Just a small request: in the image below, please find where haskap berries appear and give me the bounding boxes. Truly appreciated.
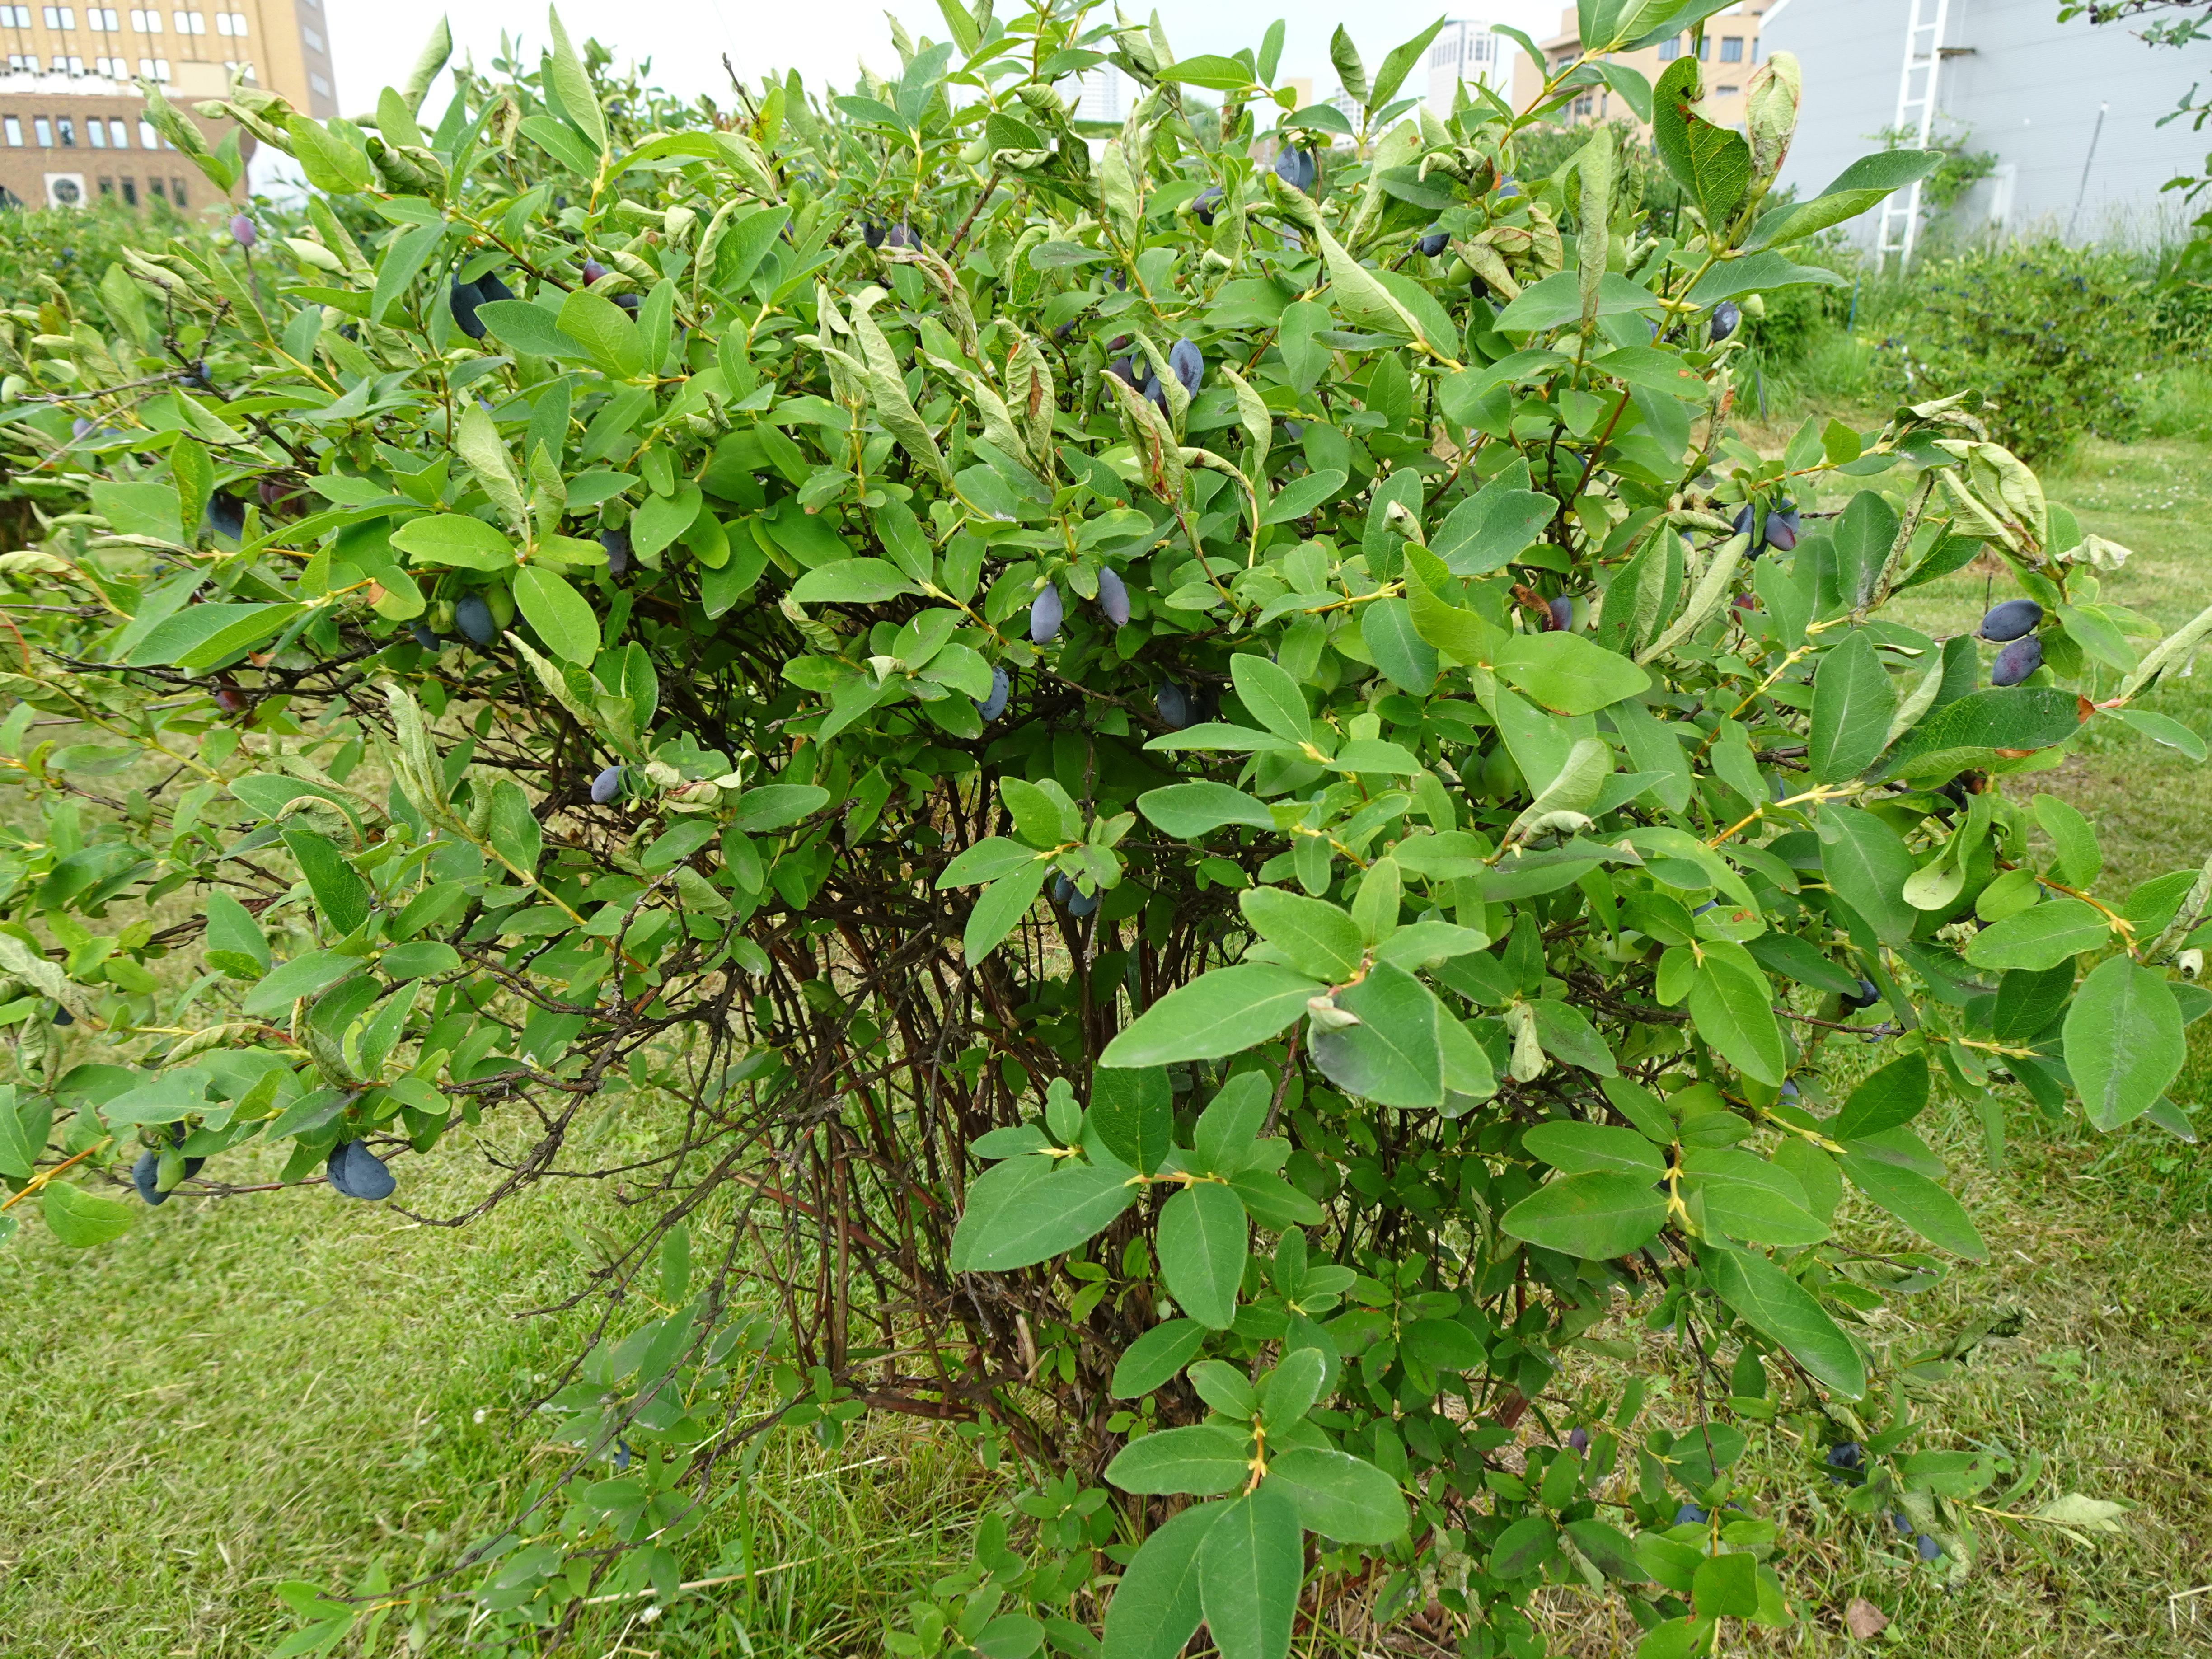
[599,526,628,572]
[613,1439,629,1470]
[214,677,250,715]
[1,372,27,404]
[1828,1441,1860,1485]
[1978,599,2043,642]
[271,475,298,516]
[447,280,489,340]
[859,203,873,226]
[1731,504,1754,555]
[260,477,273,505]
[1574,453,1588,472]
[1765,512,1795,550]
[1270,654,1279,665]
[1681,531,1694,546]
[863,213,886,247]
[889,223,904,248]
[1602,930,1654,962]
[1900,780,1949,795]
[1645,318,1666,343]
[209,491,245,539]
[451,257,515,302]
[1105,335,1130,353]
[680,327,688,340]
[72,417,91,442]
[1192,186,1222,213]
[1056,318,1074,340]
[1693,899,1718,918]
[1746,528,1768,562]
[591,764,628,805]
[582,257,607,288]
[157,1140,187,1189]
[1960,797,1969,812]
[233,214,257,246]
[1297,149,1315,194]
[1168,338,1204,401]
[1098,566,1131,627]
[1991,633,2041,686]
[345,1140,397,1201]
[101,427,123,436]
[457,595,494,644]
[1418,222,1450,258]
[1894,1513,1913,1534]
[612,292,639,324]
[179,362,212,387]
[785,219,792,237]
[1778,1076,1798,1107]
[1157,683,1186,729]
[1031,584,1062,645]
[1732,591,1754,626]
[1198,211,1215,226]
[1068,876,1098,919]
[910,229,922,252]
[1935,776,1962,818]
[1497,176,1518,199]
[1917,1533,1943,1559]
[1130,351,1152,394]
[1841,980,1881,1008]
[408,622,443,652]
[1052,871,1072,903]
[1275,143,1300,185]
[1542,593,1572,632]
[170,1122,206,1179]
[1102,264,1126,292]
[1673,1503,1711,1526]
[327,1138,358,1198]
[1495,305,1506,313]
[1848,1461,1867,1487]
[1569,1426,1587,1457]
[1104,355,1131,401]
[290,480,312,520]
[479,396,492,412]
[133,1146,172,1208]
[960,137,989,164]
[1709,300,1740,342]
[976,667,1009,721]
[1145,374,1168,419]
[1771,497,1799,536]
